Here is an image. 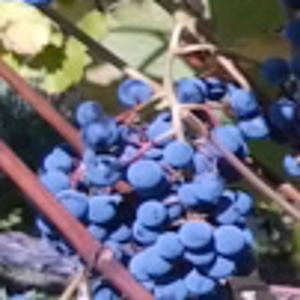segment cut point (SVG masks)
Segmentation results:
<instances>
[{
  "mask_svg": "<svg viewBox=\"0 0 300 300\" xmlns=\"http://www.w3.org/2000/svg\"><path fill=\"white\" fill-rule=\"evenodd\" d=\"M184 23L176 20L171 30L170 39L168 43V50L166 56V64L164 67V74L162 79V92L168 110L172 113L173 128L180 130L182 128V112L177 105L174 95L172 93V78L175 69V61L177 54V47L179 44L180 34L183 30Z\"/></svg>",
  "mask_w": 300,
  "mask_h": 300,
  "instance_id": "6a23745f",
  "label": "cut point"
}]
</instances>
